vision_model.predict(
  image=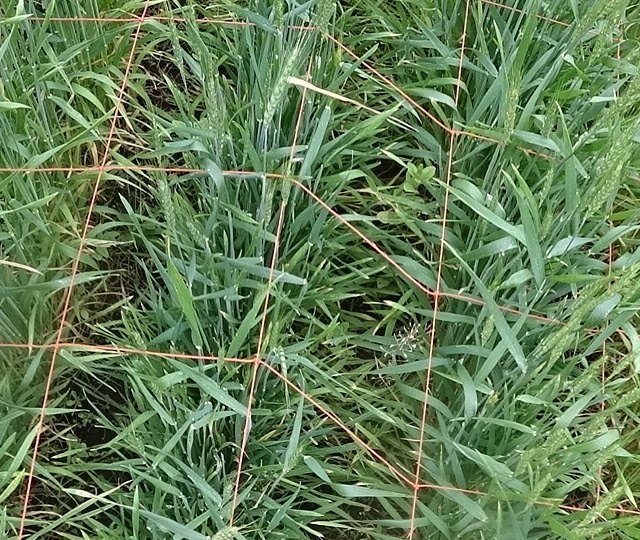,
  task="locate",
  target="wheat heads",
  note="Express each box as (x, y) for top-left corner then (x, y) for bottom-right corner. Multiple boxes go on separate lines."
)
(582, 266), (635, 311)
(569, 0), (601, 43)
(550, 335), (572, 364)
(588, 355), (603, 372)
(260, 189), (274, 227)
(577, 176), (616, 221)
(151, 379), (164, 401)
(183, 221), (208, 247)
(146, 125), (161, 160)
(589, 15), (615, 63)
(581, 492), (622, 518)
(527, 476), (547, 503)
(129, 434), (145, 457)
(536, 166), (552, 204)
(538, 213), (552, 242)
(202, 68), (218, 118)
(220, 480), (238, 498)
(284, 449), (302, 471)
(272, 1), (282, 33)
(520, 451), (532, 476)
(586, 443), (617, 477)
(544, 316), (579, 351)
(611, 348), (640, 374)
(130, 330), (152, 356)
(264, 55), (296, 118)
(279, 172), (291, 201)
(269, 319), (282, 348)
(214, 349), (229, 374)
(503, 88), (520, 143)
(567, 370), (595, 401)
(213, 524), (238, 539)
(157, 174), (179, 244)
(594, 124), (633, 168)
(166, 15), (179, 62)
(611, 386), (637, 408)
(540, 97), (559, 138)
(542, 429), (561, 451)
(480, 313), (494, 348)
